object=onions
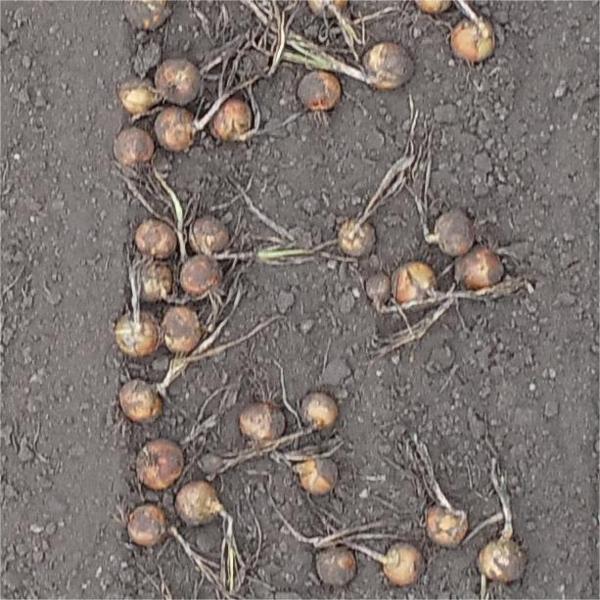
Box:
[186,214,229,253]
[315,545,356,582]
[477,538,523,581]
[138,263,173,299]
[434,209,473,253]
[365,274,390,303]
[152,106,194,150]
[118,381,160,422]
[394,262,435,302]
[180,253,218,295]
[425,504,464,546]
[113,313,158,355]
[237,402,278,444]
[175,479,223,525]
[363,40,411,90]
[306,0,349,16]
[413,0,448,15]
[294,456,337,493]
[123,502,165,545]
[297,69,340,111]
[126,0,169,31]
[119,81,157,113]
[299,390,338,428]
[380,542,422,585]
[133,440,182,488]
[112,129,155,168]
[457,247,501,288]
[156,58,198,104]
[134,219,175,258]
[211,95,252,141]
[336,218,372,254]
[159,306,200,352]
[449,12,495,60]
